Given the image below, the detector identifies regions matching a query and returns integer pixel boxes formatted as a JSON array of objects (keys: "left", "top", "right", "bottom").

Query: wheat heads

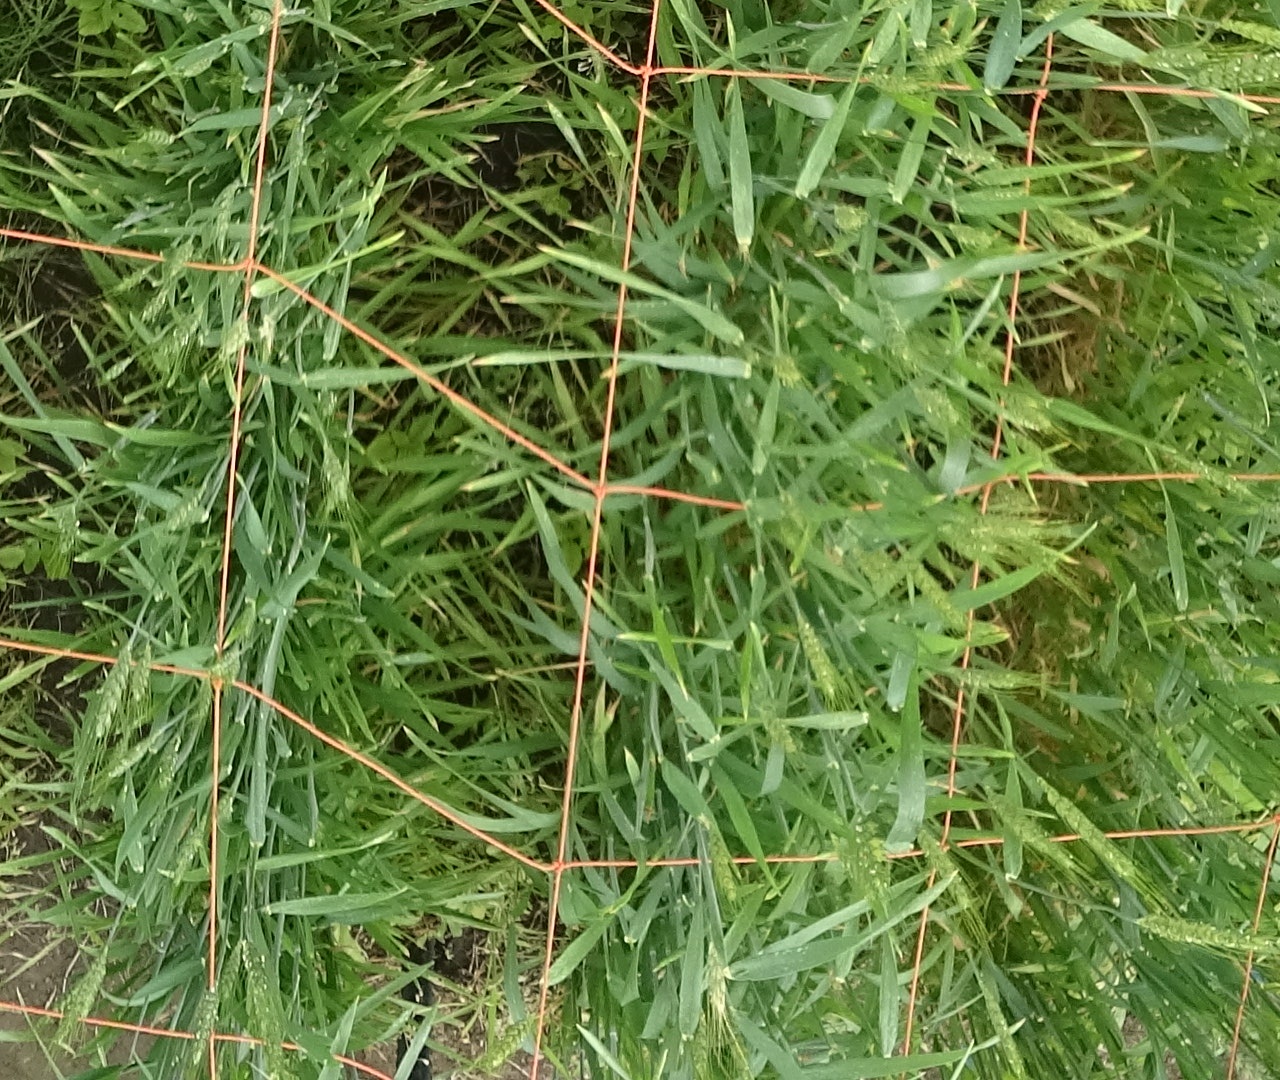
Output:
[
  {"left": 287, "top": 129, "right": 301, "bottom": 167},
  {"left": 246, "top": 7, "right": 274, "bottom": 26},
  {"left": 943, "top": 219, "right": 992, "bottom": 243},
  {"left": 1176, "top": 460, "right": 1245, "bottom": 498},
  {"left": 147, "top": 289, "right": 167, "bottom": 312},
  {"left": 957, "top": 515, "right": 1063, "bottom": 539},
  {"left": 213, "top": 634, "right": 262, "bottom": 680},
  {"left": 218, "top": 797, "right": 231, "bottom": 819},
  {"left": 136, "top": 126, "right": 171, "bottom": 149},
  {"left": 914, "top": 822, "right": 969, "bottom": 902},
  {"left": 1184, "top": 52, "right": 1279, "bottom": 84},
  {"left": 195, "top": 988, "right": 221, "bottom": 1055},
  {"left": 847, "top": 833, "right": 884, "bottom": 906},
  {"left": 172, "top": 825, "right": 201, "bottom": 876},
  {"left": 877, "top": 300, "right": 915, "bottom": 363},
  {"left": 755, "top": 703, "right": 790, "bottom": 750},
  {"left": 964, "top": 183, "right": 1026, "bottom": 201},
  {"left": 133, "top": 646, "right": 153, "bottom": 696},
  {"left": 799, "top": 624, "right": 835, "bottom": 695},
  {"left": 939, "top": 667, "right": 1018, "bottom": 692},
  {"left": 95, "top": 646, "right": 130, "bottom": 730},
  {"left": 851, "top": 543, "right": 881, "bottom": 579},
  {"left": 1138, "top": 915, "right": 1269, "bottom": 953},
  {"left": 1139, "top": 44, "right": 1210, "bottom": 67},
  {"left": 171, "top": 308, "right": 202, "bottom": 345},
  {"left": 990, "top": 386, "right": 1034, "bottom": 413},
  {"left": 1220, "top": 14, "right": 1278, "bottom": 48},
  {"left": 67, "top": 960, "right": 109, "bottom": 1021},
  {"left": 834, "top": 203, "right": 863, "bottom": 225},
  {"left": 199, "top": 682, "right": 212, "bottom": 718},
  {"left": 220, "top": 319, "right": 251, "bottom": 355},
  {"left": 111, "top": 744, "right": 150, "bottom": 776},
  {"left": 874, "top": 70, "right": 918, "bottom": 96},
  {"left": 914, "top": 385, "right": 953, "bottom": 424},
  {"left": 688, "top": 1022, "right": 709, "bottom": 1076},
  {"left": 986, "top": 788, "right": 1062, "bottom": 865},
  {"left": 999, "top": 407, "right": 1054, "bottom": 432},
  {"left": 916, "top": 44, "right": 966, "bottom": 64},
  {"left": 175, "top": 243, "right": 190, "bottom": 271},
  {"left": 710, "top": 948, "right": 724, "bottom": 1009},
  {"left": 248, "top": 962, "right": 273, "bottom": 1028},
  {"left": 773, "top": 354, "right": 801, "bottom": 379},
  {"left": 1050, "top": 209, "right": 1099, "bottom": 248},
  {"left": 1045, "top": 778, "right": 1131, "bottom": 873},
  {"left": 705, "top": 825, "right": 731, "bottom": 892},
  {"left": 981, "top": 983, "right": 1020, "bottom": 1069},
  {"left": 905, "top": 566, "right": 961, "bottom": 629},
  {"left": 158, "top": 736, "right": 180, "bottom": 786},
  {"left": 943, "top": 142, "right": 987, "bottom": 160},
  {"left": 218, "top": 947, "right": 242, "bottom": 997},
  {"left": 943, "top": 525, "right": 985, "bottom": 558},
  {"left": 324, "top": 451, "right": 344, "bottom": 495},
  {"left": 159, "top": 488, "right": 204, "bottom": 528},
  {"left": 212, "top": 187, "right": 236, "bottom": 242}
]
